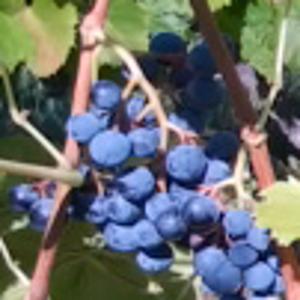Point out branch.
<instances>
[{"label":"branch","instance_id":"obj_1","mask_svg":"<svg viewBox=\"0 0 300 300\" xmlns=\"http://www.w3.org/2000/svg\"><path fill=\"white\" fill-rule=\"evenodd\" d=\"M192 3L194 12L204 28L213 58L233 98L236 115L242 124L239 133L251 153L258 182L262 186L272 184L276 180V172L270 157L267 139L258 125L250 94L246 88L242 87L240 76L225 51L217 23L212 17L211 5L208 0H192Z\"/></svg>","mask_w":300,"mask_h":300},{"label":"branch","instance_id":"obj_2","mask_svg":"<svg viewBox=\"0 0 300 300\" xmlns=\"http://www.w3.org/2000/svg\"><path fill=\"white\" fill-rule=\"evenodd\" d=\"M71 196V186L63 184L52 199L38 245L39 253L33 266L35 276L28 293L29 300H48L49 298V277L53 268L55 252L63 235Z\"/></svg>","mask_w":300,"mask_h":300},{"label":"branch","instance_id":"obj_3","mask_svg":"<svg viewBox=\"0 0 300 300\" xmlns=\"http://www.w3.org/2000/svg\"><path fill=\"white\" fill-rule=\"evenodd\" d=\"M107 8L108 0H95L91 23L79 54L78 73L73 91L74 102L70 105L71 112L76 115H83L87 111L92 59L104 28Z\"/></svg>","mask_w":300,"mask_h":300},{"label":"branch","instance_id":"obj_4","mask_svg":"<svg viewBox=\"0 0 300 300\" xmlns=\"http://www.w3.org/2000/svg\"><path fill=\"white\" fill-rule=\"evenodd\" d=\"M280 257L287 290V300H300V270L296 263L293 248L290 246L282 247Z\"/></svg>","mask_w":300,"mask_h":300},{"label":"branch","instance_id":"obj_5","mask_svg":"<svg viewBox=\"0 0 300 300\" xmlns=\"http://www.w3.org/2000/svg\"><path fill=\"white\" fill-rule=\"evenodd\" d=\"M64 154L68 160V165L72 169H77L81 165V150L74 143H69L64 148Z\"/></svg>","mask_w":300,"mask_h":300}]
</instances>
